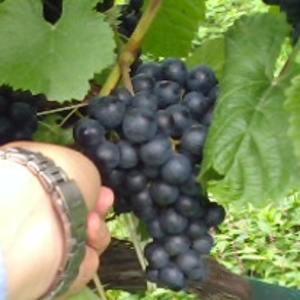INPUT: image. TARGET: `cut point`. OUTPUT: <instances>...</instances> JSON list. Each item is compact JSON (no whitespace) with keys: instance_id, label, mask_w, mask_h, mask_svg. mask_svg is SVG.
<instances>
[{"instance_id":"obj_1","label":"cut point","mask_w":300,"mask_h":300,"mask_svg":"<svg viewBox=\"0 0 300 300\" xmlns=\"http://www.w3.org/2000/svg\"><path fill=\"white\" fill-rule=\"evenodd\" d=\"M130 74H131V63L129 62L124 75L121 77V82L124 85V87L128 86L131 83V79L129 78Z\"/></svg>"}]
</instances>
